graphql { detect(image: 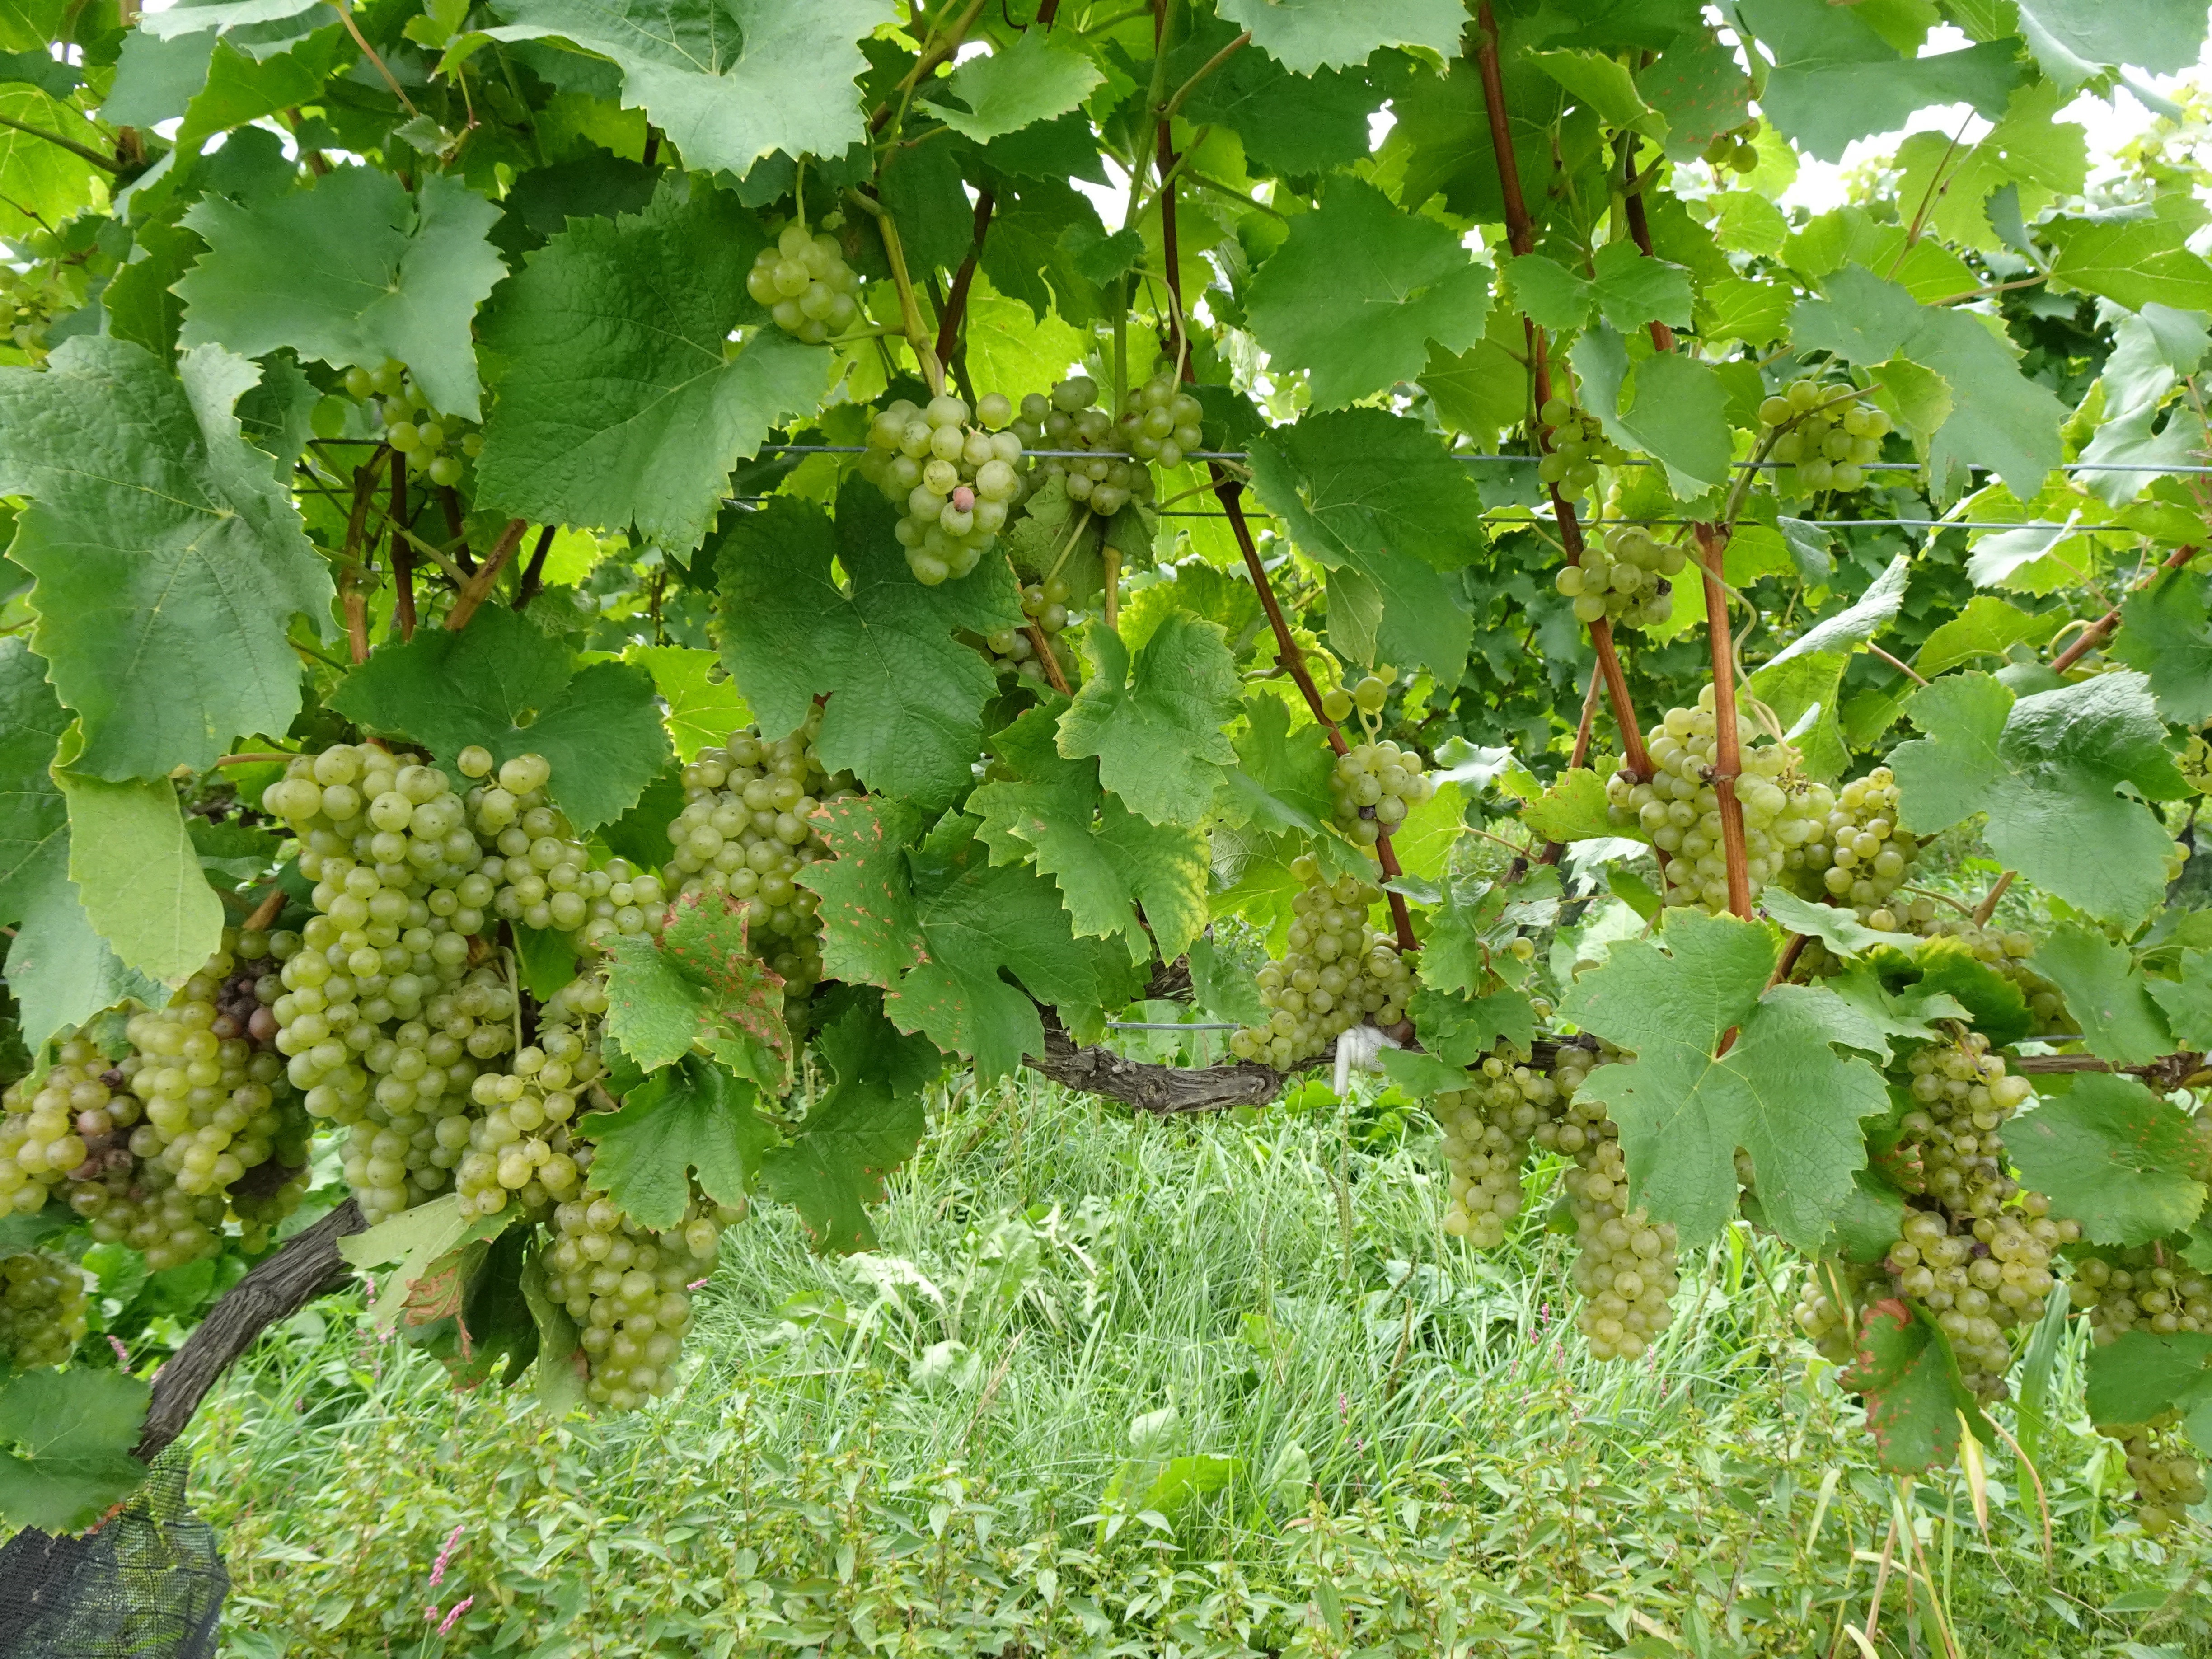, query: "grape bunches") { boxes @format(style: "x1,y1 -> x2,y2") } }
1824,766 -> 1919,931
1886,898 -> 1979,938
70,1126 -> 218,1271
1328,740 -> 1434,846
1021,375 -> 1111,491
245,913 -> 378,1118
1360,920 -> 1423,1043
573,857 -> 670,958
747,224 -> 861,346
1538,397 -> 1628,502
1884,1192 -> 2080,1402
458,745 -> 594,932
1572,959 -> 1600,983
2068,1257 -> 2212,1347
751,934 -> 824,1061
952,575 -> 1079,687
4,266 -> 78,367
1287,852 -> 1385,976
1794,1262 -> 1894,1366
1901,1032 -> 2032,1219
1228,953 -> 1365,1070
341,968 -> 514,1228
1551,1028 -> 1638,1167
262,743 -> 494,1021
455,979 -> 629,1224
1476,937 -> 1552,1019
1433,1040 -> 1564,1251
116,1002 -> 292,1197
662,703 -> 861,944
857,393 -> 1041,585
1565,1137 -> 1680,1362
1555,525 -> 1686,628
345,357 -> 487,485
1065,378 -> 1203,516
230,1115 -> 316,1251
186,928 -> 304,1039
540,1178 -> 750,1412
1779,783 -> 1837,904
0,1252 -> 90,1387
2095,1409 -> 2207,1534
1605,682 -> 1788,916
1321,663 -> 1398,722
1759,379 -> 1893,492
2,1024 -> 139,1216
1961,927 -> 2074,1047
